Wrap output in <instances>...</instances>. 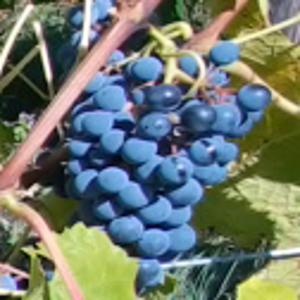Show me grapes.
Segmentation results:
<instances>
[{
  "label": "grapes",
  "mask_w": 300,
  "mask_h": 300,
  "mask_svg": "<svg viewBox=\"0 0 300 300\" xmlns=\"http://www.w3.org/2000/svg\"><path fill=\"white\" fill-rule=\"evenodd\" d=\"M240 60L237 41H216L207 51L184 54L178 67L187 79L156 82L158 58L142 50H116L85 92L91 96L70 115L75 136L66 144L74 195L90 202L91 217L108 225L119 248L136 245V278L142 289L158 287L161 264L191 253L198 234L187 224L204 187L228 177L239 155L229 139H242L272 104L264 84L237 94L224 69Z\"/></svg>",
  "instance_id": "01657485"
},
{
  "label": "grapes",
  "mask_w": 300,
  "mask_h": 300,
  "mask_svg": "<svg viewBox=\"0 0 300 300\" xmlns=\"http://www.w3.org/2000/svg\"><path fill=\"white\" fill-rule=\"evenodd\" d=\"M116 6V0H94L90 12V19L96 24L104 23Z\"/></svg>",
  "instance_id": "b958b902"
},
{
  "label": "grapes",
  "mask_w": 300,
  "mask_h": 300,
  "mask_svg": "<svg viewBox=\"0 0 300 300\" xmlns=\"http://www.w3.org/2000/svg\"><path fill=\"white\" fill-rule=\"evenodd\" d=\"M69 23L75 29H80L84 25V11L80 7H74L69 13Z\"/></svg>",
  "instance_id": "0513c4c2"
},
{
  "label": "grapes",
  "mask_w": 300,
  "mask_h": 300,
  "mask_svg": "<svg viewBox=\"0 0 300 300\" xmlns=\"http://www.w3.org/2000/svg\"><path fill=\"white\" fill-rule=\"evenodd\" d=\"M0 288L8 292H13L17 288V282L14 277L9 274H1L0 275Z\"/></svg>",
  "instance_id": "84f90ec7"
}]
</instances>
